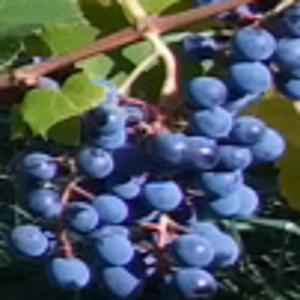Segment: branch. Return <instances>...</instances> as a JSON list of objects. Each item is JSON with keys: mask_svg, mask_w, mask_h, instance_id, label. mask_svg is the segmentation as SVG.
<instances>
[{"mask_svg": "<svg viewBox=\"0 0 300 300\" xmlns=\"http://www.w3.org/2000/svg\"><path fill=\"white\" fill-rule=\"evenodd\" d=\"M244 0H218L205 6L180 13L174 17L144 25H137L96 42L74 48L53 61L39 63L26 70L10 73L0 78V89L9 90L15 86L30 83L39 77L58 74L78 61L113 52L121 46L129 45L136 40L148 38L152 34L169 33L185 26L199 23L222 13H228L242 7Z\"/></svg>", "mask_w": 300, "mask_h": 300, "instance_id": "1", "label": "branch"}]
</instances>
